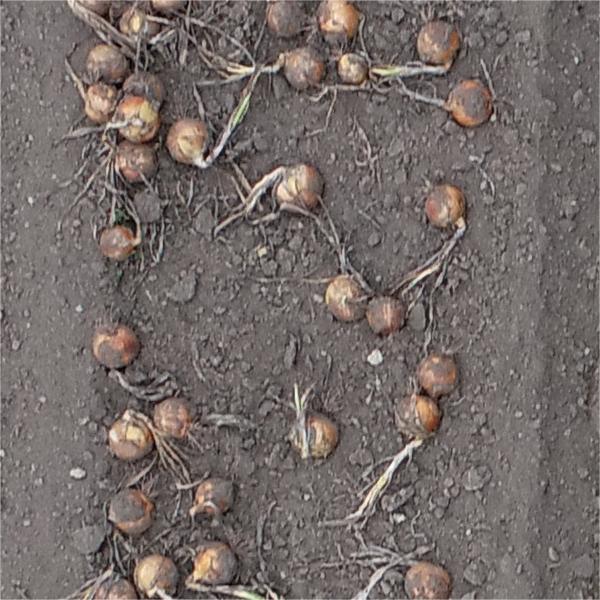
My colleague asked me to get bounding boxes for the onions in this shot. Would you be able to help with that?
[422,185,464,226]
[167,117,208,163]
[443,79,489,126]
[83,83,116,121]
[336,51,369,83]
[97,222,136,258]
[108,484,153,535]
[265,1,302,35]
[108,414,152,459]
[84,573,133,597]
[273,164,320,209]
[151,397,190,437]
[133,552,177,593]
[326,274,364,319]
[400,394,441,430]
[113,139,157,180]
[72,0,108,14]
[193,477,229,516]
[150,0,180,9]
[403,560,449,599]
[112,93,158,140]
[86,42,124,81]
[278,48,322,87]
[290,415,335,456]
[317,1,359,37]
[124,68,162,105]
[91,323,137,366]
[365,294,402,333]
[191,543,233,583]
[417,20,460,65]
[119,7,147,35]
[414,350,456,393]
